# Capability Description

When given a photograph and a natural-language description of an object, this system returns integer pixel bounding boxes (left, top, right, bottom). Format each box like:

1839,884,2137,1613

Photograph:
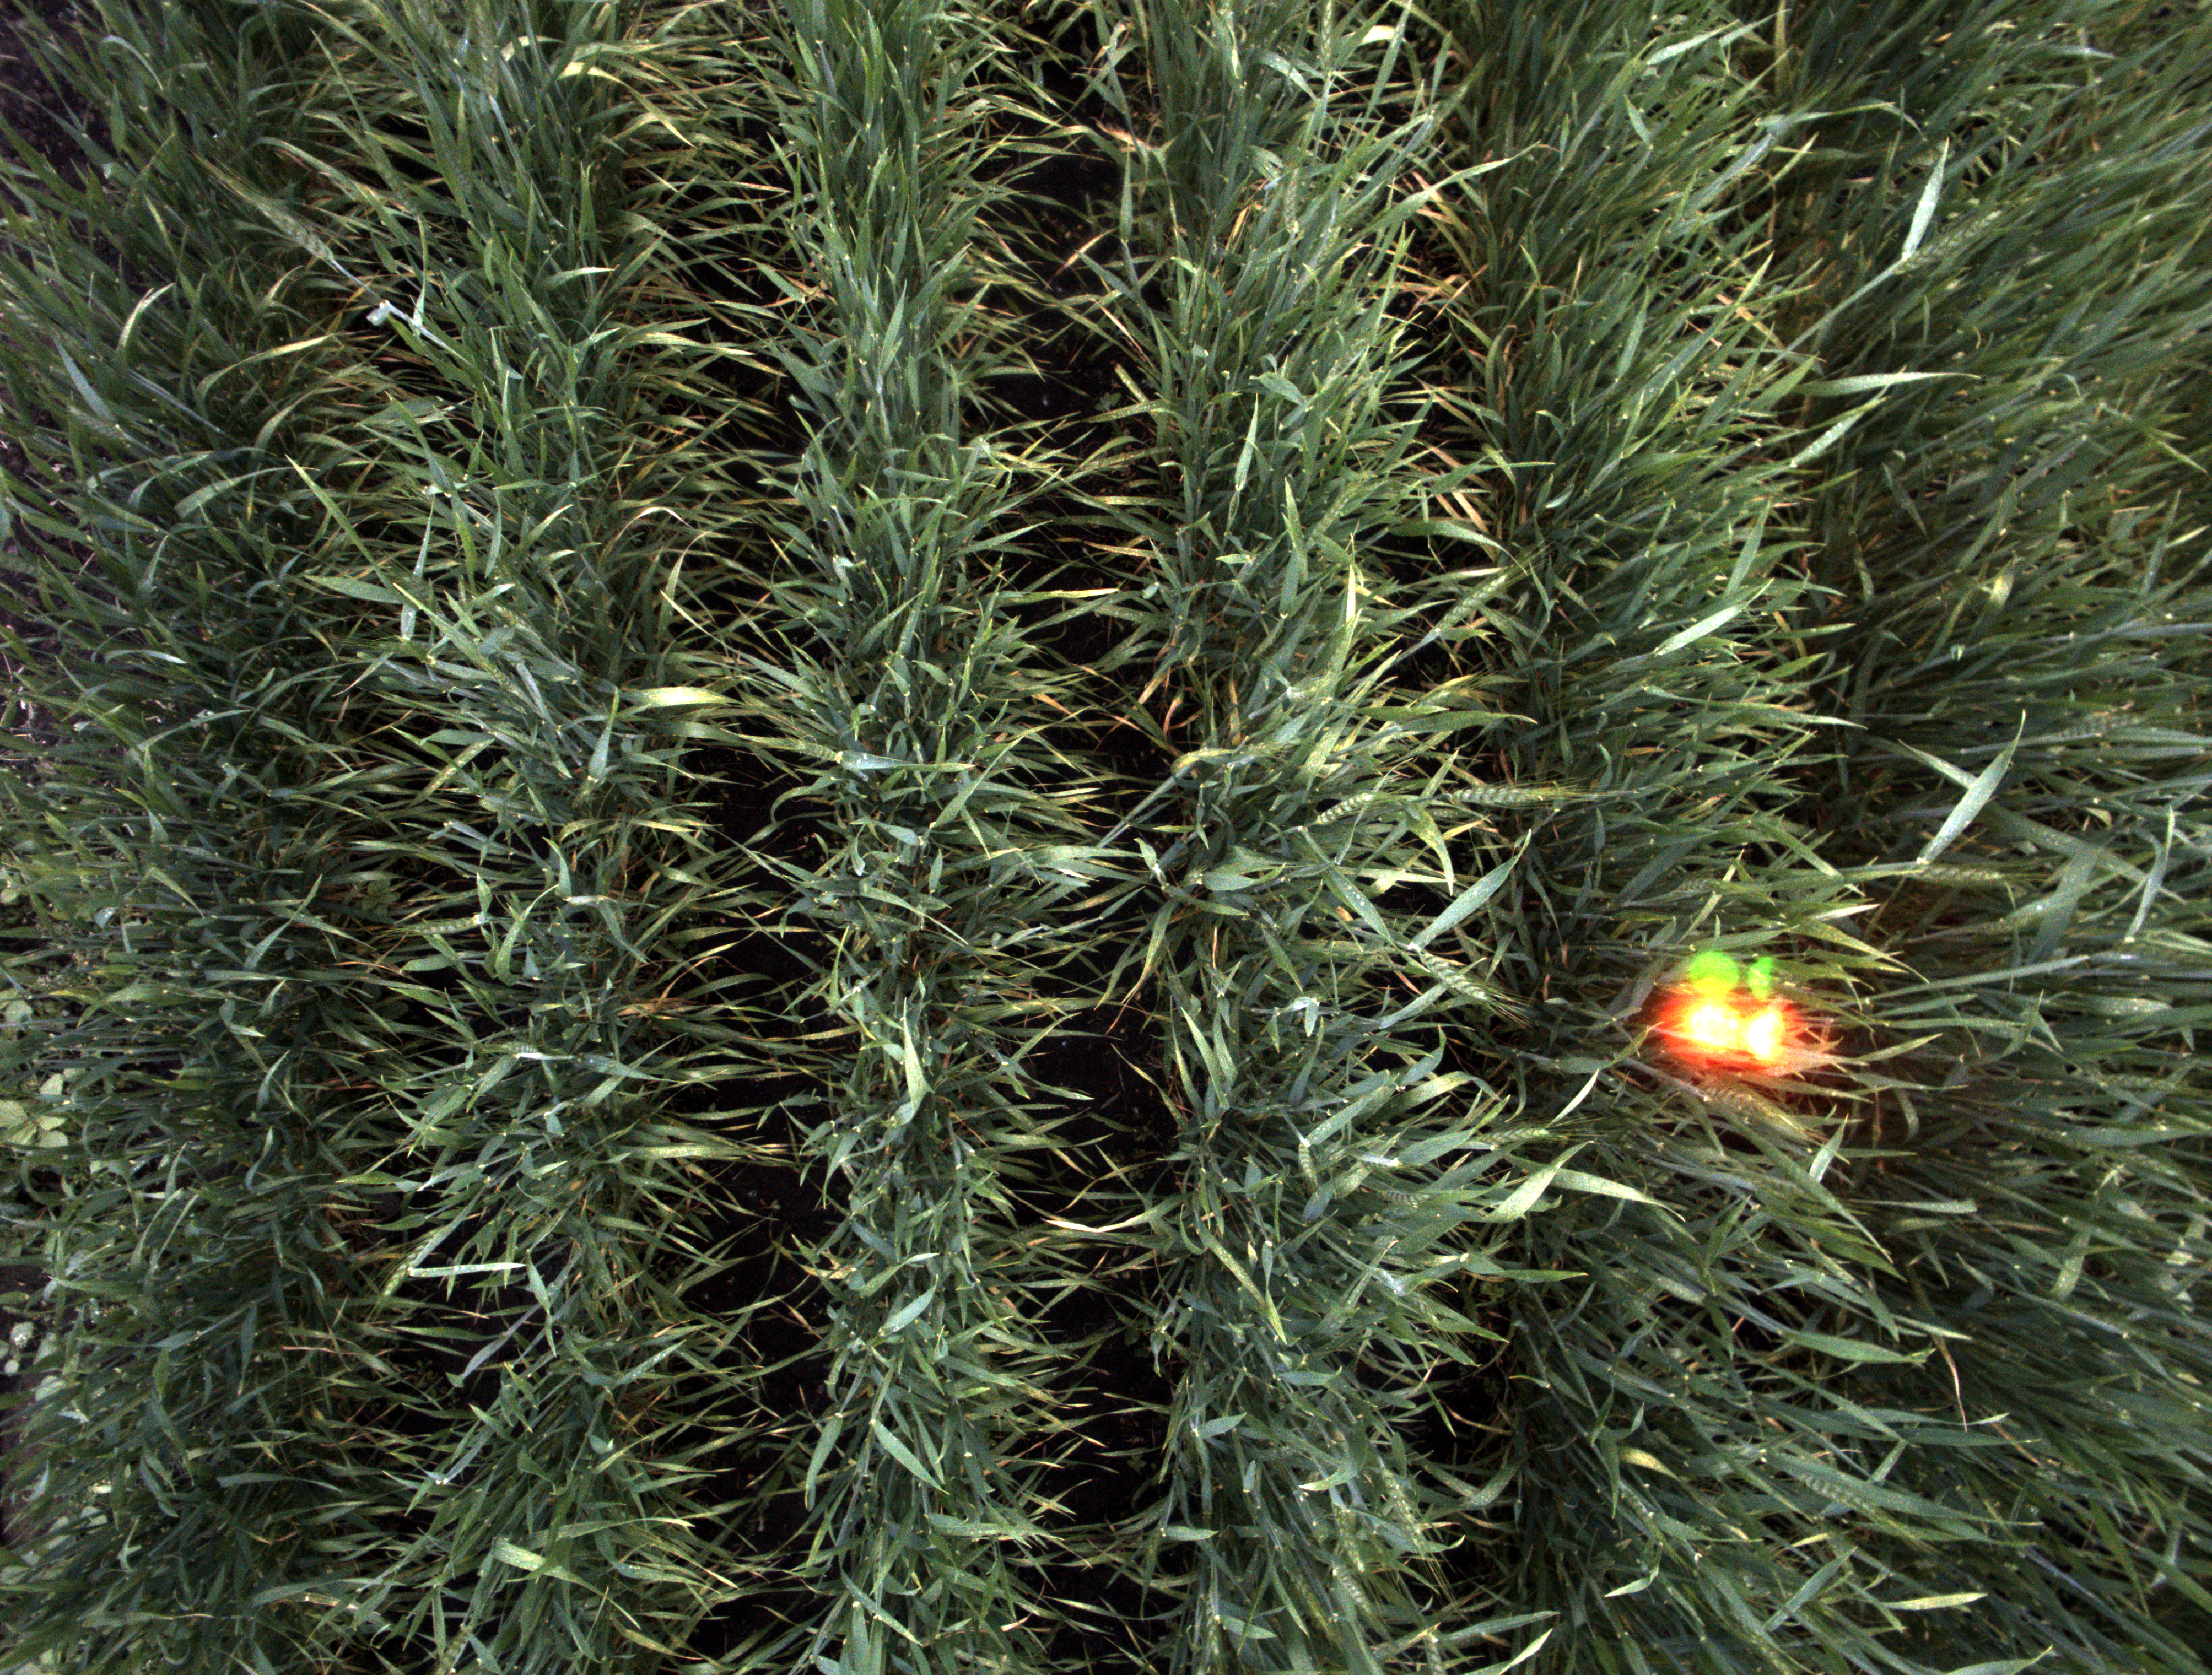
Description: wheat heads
1424,1630,1443,1670
422,914,483,934
362,138,414,210
874,1545,880,1581
2123,1148,2175,1174
1296,1137,1318,1183
1503,109,1515,163
442,148,473,196
1382,1467,1429,1556
1471,108,1481,139
1280,178,1297,236
2052,710,2123,735
1249,745,1271,757
1976,915,2030,937
1308,481,1360,539
1312,1,1334,71
1678,875,1729,892
68,405,118,438
904,939,911,954
379,1224,461,1297
1326,226,1345,258
1623,1481,1671,1547
1203,1586,1222,1655
2023,1127,2097,1154
431,1630,476,1669
2100,1075,2181,1093
1902,208,2004,270
474,4,499,91
251,202,333,265
1333,341,1368,378
1422,84,1470,146
1301,331,1313,351
1178,293,1190,333
779,736,837,761
1314,790,1375,824
494,603,527,629
2136,942,2212,960
1438,573,1512,626
1329,638,1350,671
1454,786,1540,807
484,661,513,691
410,2,451,55
1382,1192,1430,1209
1423,950,1486,997
1914,861,2003,885
1331,1562,1377,1619
1700,1084,1776,1122
1333,1508,1366,1572
1782,1464,1878,1517
1474,1125,1553,1144
497,1039,541,1054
